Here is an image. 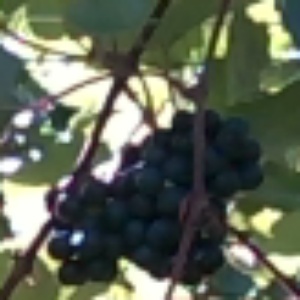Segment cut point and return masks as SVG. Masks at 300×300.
I'll use <instances>...</instances> for the list:
<instances>
[{"label":"cut point","instance_id":"cut-point-1","mask_svg":"<svg viewBox=\"0 0 300 300\" xmlns=\"http://www.w3.org/2000/svg\"><path fill=\"white\" fill-rule=\"evenodd\" d=\"M135 77L138 78L140 82V90L145 105L143 104L138 93L133 89L129 81H125L124 84L121 86V89L125 92L128 101L130 103L134 102L139 112L140 121L130 130L127 137L128 142H131L133 140L135 132L138 129L143 130L145 127L149 128L150 130L158 129L157 120L154 114V112L156 111V107L149 80L145 78L141 70L137 71Z\"/></svg>","mask_w":300,"mask_h":300}]
</instances>
